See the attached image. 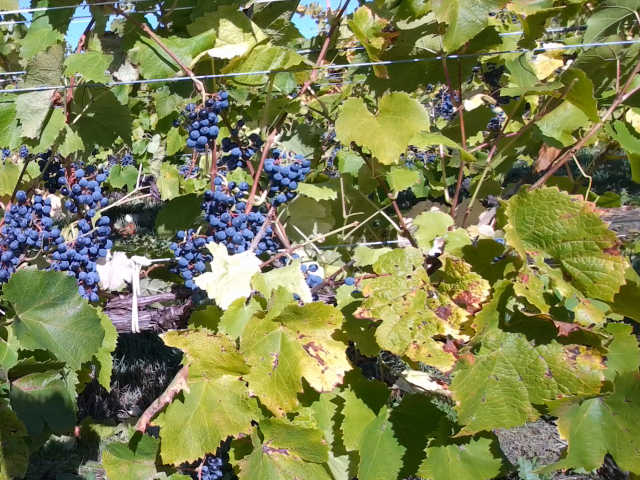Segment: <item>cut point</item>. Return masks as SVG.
Returning a JSON list of instances; mask_svg holds the SVG:
<instances>
[{
  "label": "cut point",
  "mask_w": 640,
  "mask_h": 480,
  "mask_svg": "<svg viewBox=\"0 0 640 480\" xmlns=\"http://www.w3.org/2000/svg\"><path fill=\"white\" fill-rule=\"evenodd\" d=\"M192 80L198 82L202 86L203 93H205L204 82L202 80H200V79H197L195 76L192 77Z\"/></svg>",
  "instance_id": "6a23745f"
}]
</instances>
